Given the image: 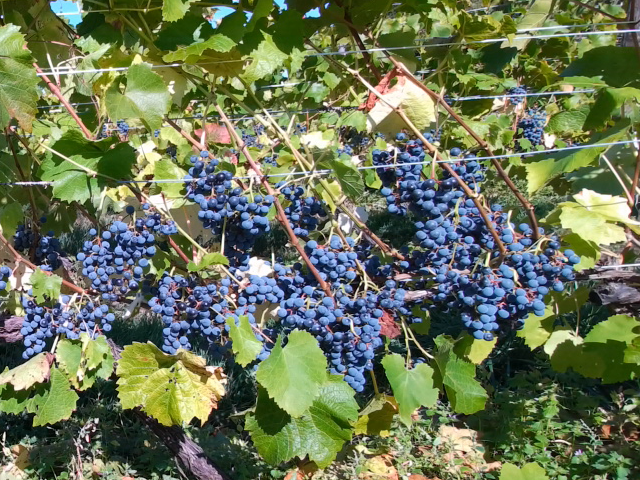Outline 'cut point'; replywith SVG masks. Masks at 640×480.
Segmentation results:
<instances>
[{
  "label": "cut point",
  "instance_id": "obj_1",
  "mask_svg": "<svg viewBox=\"0 0 640 480\" xmlns=\"http://www.w3.org/2000/svg\"><path fill=\"white\" fill-rule=\"evenodd\" d=\"M547 241V236H543V239H541L540 241H538L537 245H536V251H539V247L541 246L542 243Z\"/></svg>",
  "mask_w": 640,
  "mask_h": 480
},
{
  "label": "cut point",
  "instance_id": "obj_2",
  "mask_svg": "<svg viewBox=\"0 0 640 480\" xmlns=\"http://www.w3.org/2000/svg\"><path fill=\"white\" fill-rule=\"evenodd\" d=\"M255 174H257V173L254 172V173L251 174V179H250V182H249L248 190L252 189V185H253V180H254V175Z\"/></svg>",
  "mask_w": 640,
  "mask_h": 480
}]
</instances>
